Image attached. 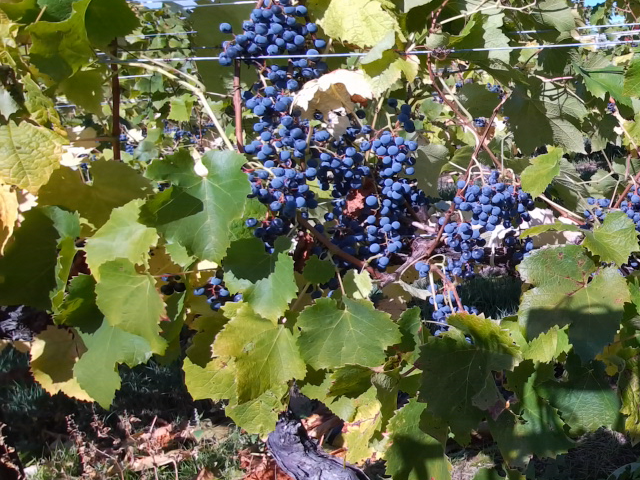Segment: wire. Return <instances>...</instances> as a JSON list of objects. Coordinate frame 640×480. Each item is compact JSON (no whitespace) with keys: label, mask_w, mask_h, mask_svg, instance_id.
<instances>
[{"label":"wire","mask_w":640,"mask_h":480,"mask_svg":"<svg viewBox=\"0 0 640 480\" xmlns=\"http://www.w3.org/2000/svg\"><path fill=\"white\" fill-rule=\"evenodd\" d=\"M627 44H640V39H625L621 41H608L602 43H565L555 45H516V46H479L455 49L439 50H403L401 56L405 55H441V54H464L467 52L482 51H518V50H557L567 48H604L610 46H623Z\"/></svg>","instance_id":"wire-1"},{"label":"wire","mask_w":640,"mask_h":480,"mask_svg":"<svg viewBox=\"0 0 640 480\" xmlns=\"http://www.w3.org/2000/svg\"><path fill=\"white\" fill-rule=\"evenodd\" d=\"M366 52H335L328 54H285V55H263V54H242L235 55V60L261 59V60H287V59H330L337 57H366Z\"/></svg>","instance_id":"wire-2"},{"label":"wire","mask_w":640,"mask_h":480,"mask_svg":"<svg viewBox=\"0 0 640 480\" xmlns=\"http://www.w3.org/2000/svg\"><path fill=\"white\" fill-rule=\"evenodd\" d=\"M206 60L216 61L217 57L204 55L201 57H158V58H132V59H101V64H134V63H169V62H204Z\"/></svg>","instance_id":"wire-3"}]
</instances>
